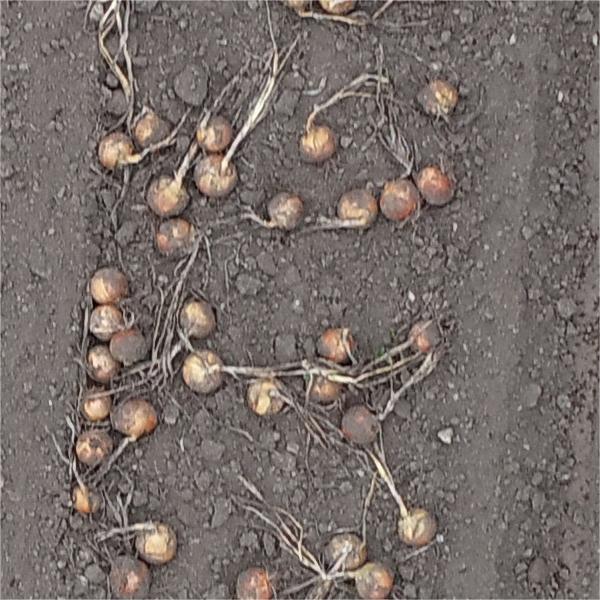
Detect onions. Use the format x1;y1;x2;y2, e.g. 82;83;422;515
282;0;318;7
89;307;122;339
195;117;230;151
112;396;156;437
351;561;393;597
304;377;342;404
195;155;236;196
232;566;271;599
319;0;353;13
409;319;439;351
243;377;280;413
132;108;167;144
106;557;146;595
413;163;452;204
267;191;304;228
74;431;109;464
396;508;434;545
88;267;126;304
148;174;188;213
323;532;362;569
179;300;214;337
97;132;132;167
318;326;355;362
135;522;176;563
337;406;379;447
109;327;146;364
81;392;108;419
154;215;192;252
420;77;457;114
182;350;222;391
378;180;415;220
337;188;374;226
87;348;120;381
69;484;96;511
299;123;335;159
